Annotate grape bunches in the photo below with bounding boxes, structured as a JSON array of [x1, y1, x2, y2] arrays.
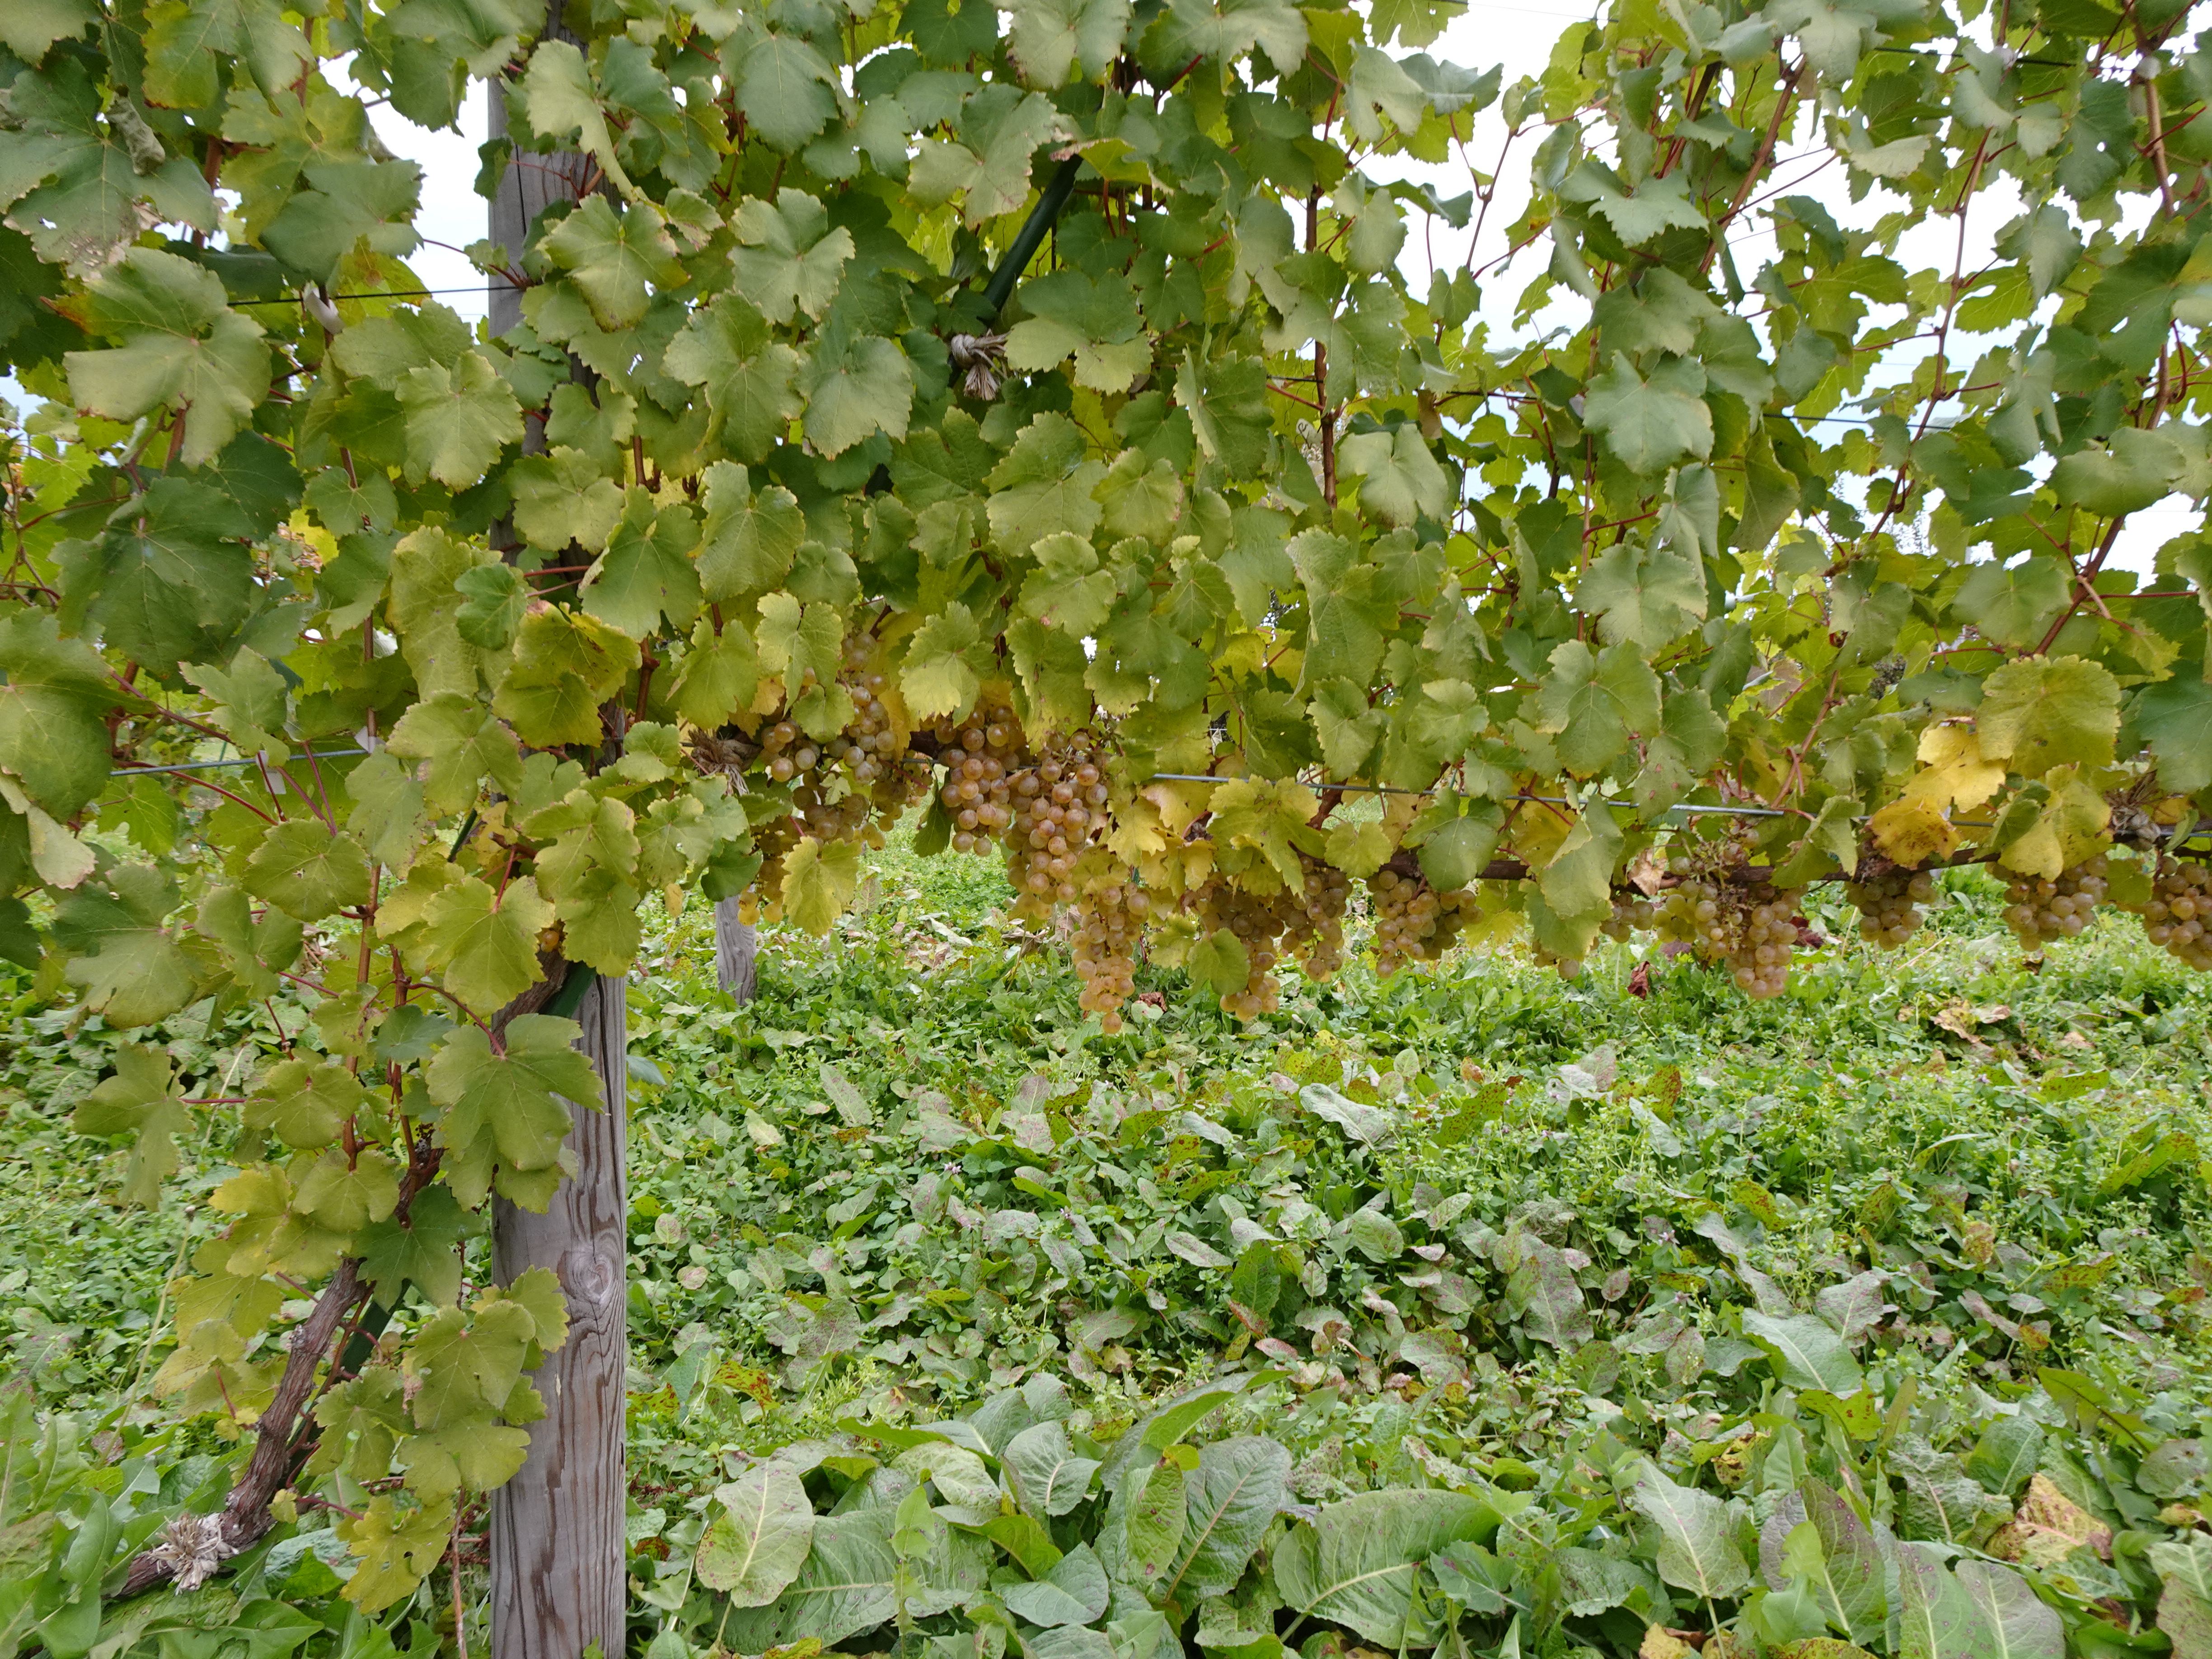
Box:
[[1691, 830, 1761, 939], [758, 711, 815, 784], [1005, 730, 1107, 926], [754, 785, 885, 904], [1362, 869, 1440, 982], [796, 633, 901, 785], [1528, 892, 1655, 982], [1423, 885, 1484, 959], [1996, 852, 2115, 954], [537, 909, 565, 957], [2111, 857, 2212, 980], [930, 702, 1017, 860], [1068, 880, 1155, 1038], [1843, 864, 1942, 955], [1653, 856, 1749, 975], [867, 765, 934, 836], [1276, 856, 1355, 987], [1198, 879, 1286, 1025], [1723, 885, 1814, 1003]]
